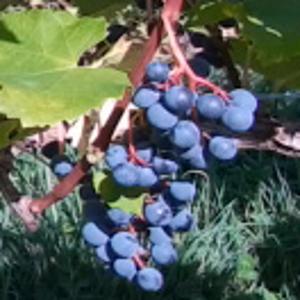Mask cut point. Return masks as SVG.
Masks as SVG:
<instances>
[{"label":"cut point","instance_id":"obj_1","mask_svg":"<svg viewBox=\"0 0 300 300\" xmlns=\"http://www.w3.org/2000/svg\"><path fill=\"white\" fill-rule=\"evenodd\" d=\"M162 23H163L164 30L167 34V37H168V39L172 45V48L174 50L179 69L190 79L196 80V81L200 82L201 84H203L204 86L209 87L212 90H215L217 88V85L214 82H212L211 80H208L205 77H202L200 75H197V74L191 72L187 68L185 61L183 59L182 50L179 46L178 40L175 37L174 31L170 25L169 19L167 17H164L162 19Z\"/></svg>","mask_w":300,"mask_h":300}]
</instances>
